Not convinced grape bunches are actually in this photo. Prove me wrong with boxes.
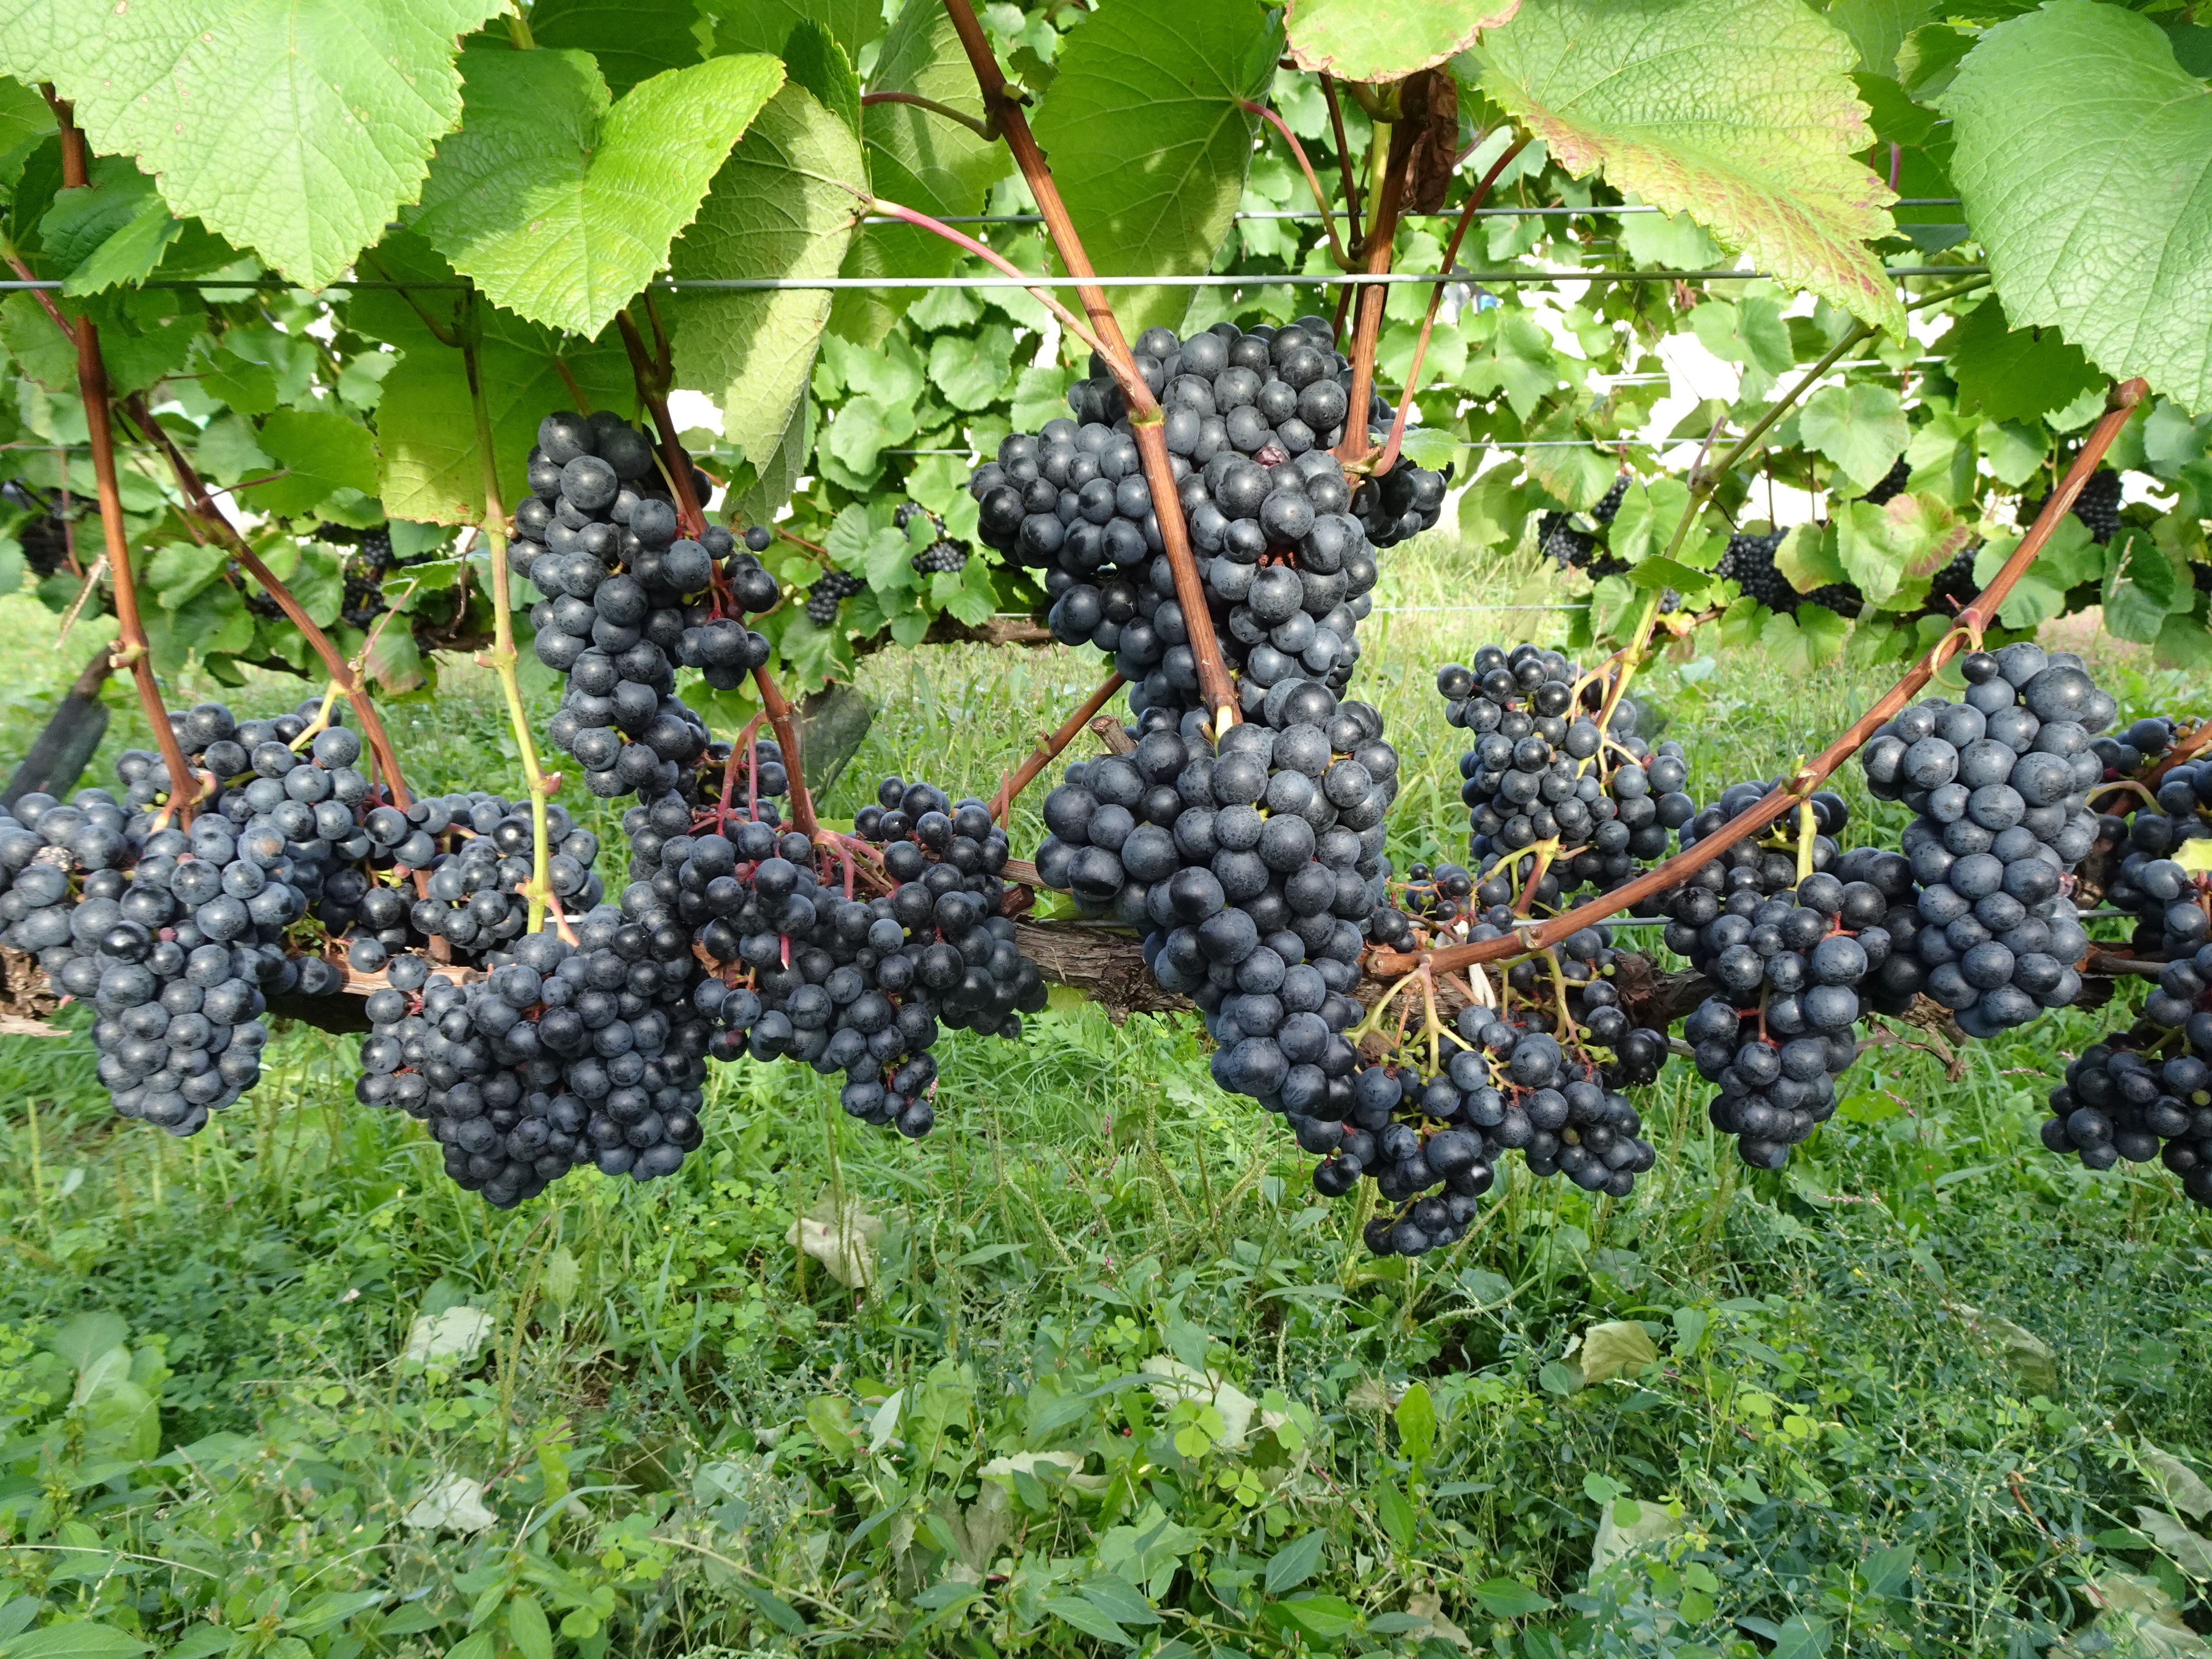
[427,1035,590,1211]
[1468,893,1670,1086]
[69,812,307,1137]
[968,416,1158,680]
[1314,1005,1567,1256]
[2078,718,2175,807]
[1664,872,1889,1167]
[796,884,942,1137]
[1069,317,1374,722]
[2041,942,2212,1171]
[1404,861,1475,920]
[355,953,492,1119]
[1438,643,1699,919]
[506,409,777,798]
[2161,1105,2212,1207]
[0,788,178,996]
[624,799,836,1062]
[854,776,1047,1038]
[315,786,442,957]
[1035,676,1415,1155]
[1530,1062,1653,1194]
[2106,752,2212,985]
[116,699,365,997]
[1820,846,1930,1019]
[1864,642,2115,1040]
[636,735,788,826]
[406,792,604,950]
[473,909,716,1183]
[1679,777,1848,897]
[1347,466,1446,548]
